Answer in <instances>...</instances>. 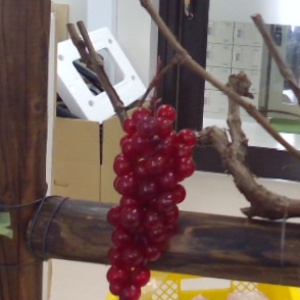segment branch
Masks as SVG:
<instances>
[{"instance_id": "30e6481e", "label": "branch", "mask_w": 300, "mask_h": 300, "mask_svg": "<svg viewBox=\"0 0 300 300\" xmlns=\"http://www.w3.org/2000/svg\"><path fill=\"white\" fill-rule=\"evenodd\" d=\"M142 8L150 15L153 22L169 36L178 54L172 58L163 68V70L154 77L148 84L146 91L138 99L132 100L130 104L124 107L123 101L119 98L106 72H104V59L100 53H97L84 24V21H76L79 32L84 39L87 49L86 53L82 40L77 35L74 23H67L66 28L73 46L80 52V62L87 67L90 72L97 75L100 79L102 88L107 92L108 99L120 117V124H123L127 117V112L135 107H141L148 98V95L155 87V82L162 77L167 70L180 61L191 66L199 75L208 81L215 89L227 96L229 103V116L226 124L229 129V135L232 142L229 141L226 132L218 125L212 124L201 130H194L197 136V144L194 148H205L210 139L215 149L219 150L220 157L223 159L222 166L234 177V182L241 193H243L250 205L240 207V210L249 217H262L268 219H277L284 217H300V199H292L286 196L274 194L262 185H258L254 178L249 174L248 168L244 165L247 151V138L245 137L242 123L240 120V108L243 107L245 113L250 116L263 132L273 140H276L284 149L300 157V150L289 143L285 137L278 133L275 127L268 124L261 113H282L300 118V114L284 110H259L243 97L254 100V95L249 92L252 82L248 79L244 71L237 74L228 75V80L223 83L216 80L201 64L197 63L191 54L181 46L178 39L173 35L172 30L166 25L164 20L158 14L156 8L152 5V0H148L147 7L143 0H139Z\"/></svg>"}, {"instance_id": "325d2c04", "label": "branch", "mask_w": 300, "mask_h": 300, "mask_svg": "<svg viewBox=\"0 0 300 300\" xmlns=\"http://www.w3.org/2000/svg\"><path fill=\"white\" fill-rule=\"evenodd\" d=\"M250 18L252 19L254 25L259 30L260 34L262 35L264 41L269 46L271 53L276 61L278 70L283 74L287 82L289 83L291 89L297 96L298 100H300V87L296 84L293 76L291 75L290 71L286 68V65L284 64V60L281 58V56L278 54L277 50L275 49V46L273 45L272 38L269 36V33L266 29L265 23L262 20V17L259 12H254L253 15H250Z\"/></svg>"}]
</instances>
